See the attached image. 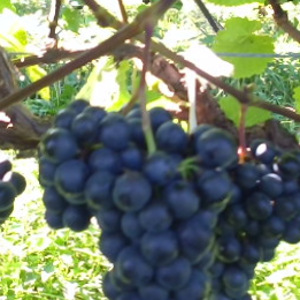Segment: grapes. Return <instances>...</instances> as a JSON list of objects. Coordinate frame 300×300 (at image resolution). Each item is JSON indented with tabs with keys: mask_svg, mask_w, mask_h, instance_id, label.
Instances as JSON below:
<instances>
[{
	"mask_svg": "<svg viewBox=\"0 0 300 300\" xmlns=\"http://www.w3.org/2000/svg\"><path fill=\"white\" fill-rule=\"evenodd\" d=\"M55 228L104 230L113 300H250L249 279L280 241L300 242V150L256 138L237 154L224 128L189 133L163 108L106 113L72 102L40 137Z\"/></svg>",
	"mask_w": 300,
	"mask_h": 300,
	"instance_id": "1",
	"label": "grapes"
},
{
	"mask_svg": "<svg viewBox=\"0 0 300 300\" xmlns=\"http://www.w3.org/2000/svg\"><path fill=\"white\" fill-rule=\"evenodd\" d=\"M11 166V157L0 155V221L12 214L14 196L21 195L27 186L26 179L20 173L10 171Z\"/></svg>",
	"mask_w": 300,
	"mask_h": 300,
	"instance_id": "2",
	"label": "grapes"
}]
</instances>
